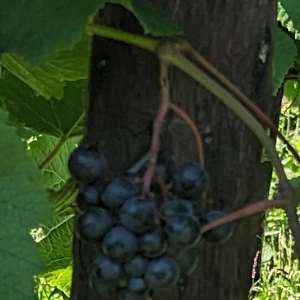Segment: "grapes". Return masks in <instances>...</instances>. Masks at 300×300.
<instances>
[{"label": "grapes", "mask_w": 300, "mask_h": 300, "mask_svg": "<svg viewBox=\"0 0 300 300\" xmlns=\"http://www.w3.org/2000/svg\"><path fill=\"white\" fill-rule=\"evenodd\" d=\"M67 168L81 186L75 234L97 254L88 266V288L97 299L145 300L171 289L196 268L192 247L203 237L223 242L234 233L228 213L198 212L193 199L205 192L209 177L197 162L181 163L163 182L138 172L108 180L103 152L82 145L70 153Z\"/></svg>", "instance_id": "01657485"}]
</instances>
